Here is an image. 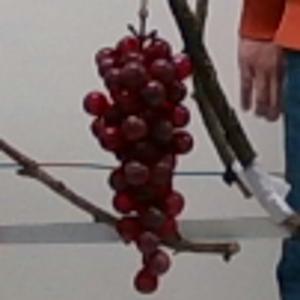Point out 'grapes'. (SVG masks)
Masks as SVG:
<instances>
[{
	"mask_svg": "<svg viewBox=\"0 0 300 300\" xmlns=\"http://www.w3.org/2000/svg\"><path fill=\"white\" fill-rule=\"evenodd\" d=\"M93 63L112 103L102 91L92 90L82 107L95 117L89 125L92 138L122 164L107 177L114 192L111 206L123 216L120 233L143 254L134 288L150 295L172 267L169 254L159 248L176 245L181 233L174 217L184 210L185 200L172 190L171 176L176 155H188L195 146L194 136L185 130L190 111L180 104L194 65L186 54L172 55L165 40L151 38L141 46L132 36L119 39L115 49H97Z\"/></svg>",
	"mask_w": 300,
	"mask_h": 300,
	"instance_id": "grapes-1",
	"label": "grapes"
}]
</instances>
